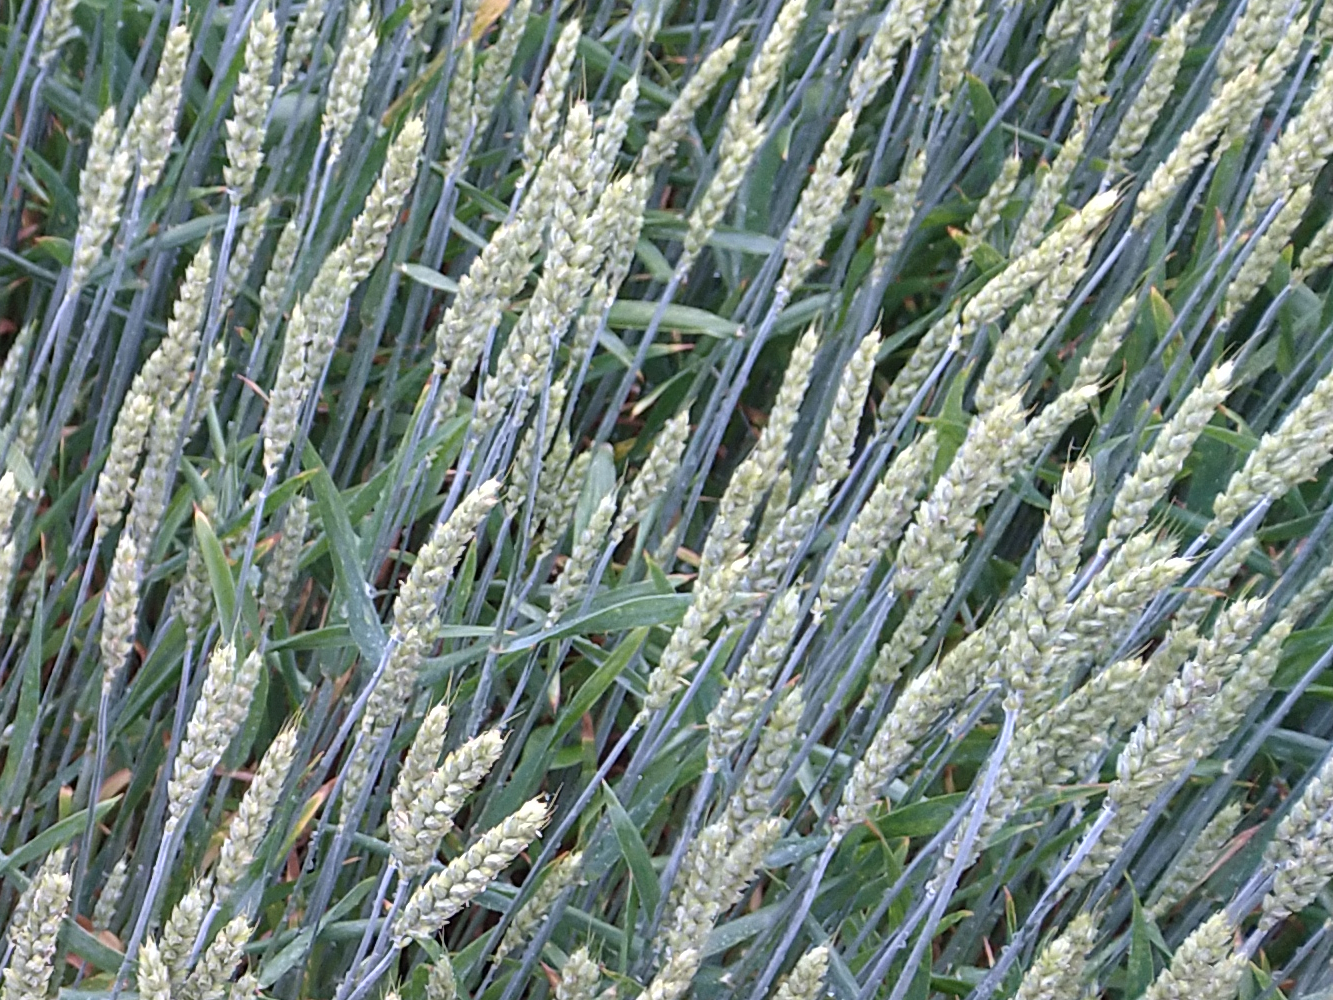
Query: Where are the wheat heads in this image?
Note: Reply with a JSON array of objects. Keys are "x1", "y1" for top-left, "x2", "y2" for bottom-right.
[
  {"x1": 93, "y1": 860, "x2": 128, "y2": 931},
  {"x1": 1225, "y1": 187, "x2": 1312, "y2": 315},
  {"x1": 1266, "y1": 801, "x2": 1333, "y2": 927},
  {"x1": 436, "y1": 229, "x2": 506, "y2": 354},
  {"x1": 546, "y1": 107, "x2": 597, "y2": 248},
  {"x1": 1108, "y1": 16, "x2": 1190, "y2": 171},
  {"x1": 976, "y1": 250, "x2": 1091, "y2": 409},
  {"x1": 548, "y1": 497, "x2": 616, "y2": 625},
  {"x1": 716, "y1": 332, "x2": 821, "y2": 532},
  {"x1": 755, "y1": 949, "x2": 832, "y2": 1000},
  {"x1": 1206, "y1": 625, "x2": 1294, "y2": 749},
  {"x1": 753, "y1": 472, "x2": 792, "y2": 549},
  {"x1": 962, "y1": 158, "x2": 1022, "y2": 252},
  {"x1": 873, "y1": 154, "x2": 927, "y2": 275},
  {"x1": 444, "y1": 42, "x2": 476, "y2": 160},
  {"x1": 913, "y1": 0, "x2": 961, "y2": 30},
  {"x1": 925, "y1": 751, "x2": 1051, "y2": 890},
  {"x1": 1171, "y1": 540, "x2": 1256, "y2": 634},
  {"x1": 613, "y1": 412, "x2": 690, "y2": 536},
  {"x1": 504, "y1": 384, "x2": 566, "y2": 510},
  {"x1": 942, "y1": 629, "x2": 983, "y2": 688},
  {"x1": 640, "y1": 563, "x2": 746, "y2": 718},
  {"x1": 477, "y1": 274, "x2": 547, "y2": 422},
  {"x1": 336, "y1": 636, "x2": 423, "y2": 824},
  {"x1": 534, "y1": 951, "x2": 599, "y2": 1000},
  {"x1": 701, "y1": 822, "x2": 784, "y2": 944},
  {"x1": 334, "y1": 37, "x2": 379, "y2": 150},
  {"x1": 817, "y1": 440, "x2": 939, "y2": 613},
  {"x1": 1223, "y1": 13, "x2": 1302, "y2": 140},
  {"x1": 0, "y1": 540, "x2": 10, "y2": 665},
  {"x1": 864, "y1": 566, "x2": 958, "y2": 702},
  {"x1": 589, "y1": 78, "x2": 640, "y2": 186},
  {"x1": 727, "y1": 690, "x2": 805, "y2": 842},
  {"x1": 1212, "y1": 381, "x2": 1333, "y2": 522},
  {"x1": 127, "y1": 403, "x2": 184, "y2": 566},
  {"x1": 219, "y1": 653, "x2": 263, "y2": 757},
  {"x1": 264, "y1": 306, "x2": 309, "y2": 473},
  {"x1": 633, "y1": 42, "x2": 740, "y2": 175},
  {"x1": 362, "y1": 625, "x2": 433, "y2": 735},
  {"x1": 1109, "y1": 369, "x2": 1235, "y2": 537},
  {"x1": 1010, "y1": 461, "x2": 1094, "y2": 687},
  {"x1": 708, "y1": 595, "x2": 801, "y2": 765},
  {"x1": 182, "y1": 509, "x2": 217, "y2": 639},
  {"x1": 0, "y1": 325, "x2": 31, "y2": 420},
  {"x1": 304, "y1": 236, "x2": 348, "y2": 322},
  {"x1": 391, "y1": 485, "x2": 503, "y2": 637},
  {"x1": 718, "y1": 0, "x2": 809, "y2": 153},
  {"x1": 7, "y1": 850, "x2": 66, "y2": 941},
  {"x1": 1020, "y1": 651, "x2": 1093, "y2": 714},
  {"x1": 221, "y1": 203, "x2": 271, "y2": 303},
  {"x1": 1119, "y1": 630, "x2": 1199, "y2": 725},
  {"x1": 37, "y1": 0, "x2": 96, "y2": 58},
  {"x1": 14, "y1": 404, "x2": 39, "y2": 461},
  {"x1": 322, "y1": 0, "x2": 372, "y2": 129},
  {"x1": 0, "y1": 473, "x2": 20, "y2": 654},
  {"x1": 1041, "y1": 0, "x2": 1150, "y2": 46},
  {"x1": 837, "y1": 644, "x2": 935, "y2": 826},
  {"x1": 686, "y1": 131, "x2": 765, "y2": 254},
  {"x1": 1066, "y1": 560, "x2": 1188, "y2": 629},
  {"x1": 1012, "y1": 133, "x2": 1084, "y2": 257},
  {"x1": 304, "y1": 270, "x2": 353, "y2": 399},
  {"x1": 1076, "y1": 0, "x2": 1117, "y2": 120},
  {"x1": 163, "y1": 247, "x2": 212, "y2": 394},
  {"x1": 786, "y1": 112, "x2": 854, "y2": 244},
  {"x1": 897, "y1": 405, "x2": 1022, "y2": 585},
  {"x1": 1314, "y1": 0, "x2": 1333, "y2": 40},
  {"x1": 24, "y1": 897, "x2": 64, "y2": 1000},
  {"x1": 1237, "y1": 65, "x2": 1333, "y2": 221},
  {"x1": 555, "y1": 958, "x2": 701, "y2": 1000},
  {"x1": 523, "y1": 20, "x2": 581, "y2": 172},
  {"x1": 282, "y1": 0, "x2": 333, "y2": 85},
  {"x1": 102, "y1": 536, "x2": 141, "y2": 690},
  {"x1": 216, "y1": 731, "x2": 296, "y2": 892},
  {"x1": 187, "y1": 346, "x2": 227, "y2": 435},
  {"x1": 1132, "y1": 73, "x2": 1253, "y2": 218},
  {"x1": 556, "y1": 173, "x2": 633, "y2": 338},
  {"x1": 518, "y1": 282, "x2": 551, "y2": 395},
  {"x1": 78, "y1": 108, "x2": 115, "y2": 237},
  {"x1": 670, "y1": 823, "x2": 727, "y2": 958},
  {"x1": 849, "y1": 0, "x2": 934, "y2": 101},
  {"x1": 261, "y1": 499, "x2": 309, "y2": 622},
  {"x1": 1093, "y1": 535, "x2": 1154, "y2": 583},
  {"x1": 167, "y1": 649, "x2": 254, "y2": 823},
  {"x1": 1281, "y1": 567, "x2": 1333, "y2": 623},
  {"x1": 224, "y1": 14, "x2": 281, "y2": 191},
  {"x1": 780, "y1": 171, "x2": 856, "y2": 298},
  {"x1": 1294, "y1": 219, "x2": 1333, "y2": 278},
  {"x1": 1260, "y1": 757, "x2": 1333, "y2": 862},
  {"x1": 963, "y1": 924, "x2": 1098, "y2": 1000},
  {"x1": 535, "y1": 428, "x2": 569, "y2": 520},
  {"x1": 1139, "y1": 958, "x2": 1246, "y2": 1000},
  {"x1": 472, "y1": 0, "x2": 533, "y2": 137},
  {"x1": 259, "y1": 222, "x2": 301, "y2": 333},
  {"x1": 141, "y1": 30, "x2": 191, "y2": 181},
  {"x1": 1287, "y1": 121, "x2": 1333, "y2": 184},
  {"x1": 396, "y1": 803, "x2": 552, "y2": 942},
  {"x1": 1092, "y1": 915, "x2": 1227, "y2": 1000},
  {"x1": 1020, "y1": 661, "x2": 1141, "y2": 757},
  {"x1": 1023, "y1": 720, "x2": 1115, "y2": 794},
  {"x1": 72, "y1": 102, "x2": 142, "y2": 279},
  {"x1": 1147, "y1": 540, "x2": 1180, "y2": 565},
  {"x1": 434, "y1": 315, "x2": 497, "y2": 423},
  {"x1": 938, "y1": 0, "x2": 989, "y2": 95},
  {"x1": 0, "y1": 874, "x2": 52, "y2": 1000},
  {"x1": 815, "y1": 332, "x2": 881, "y2": 485},
  {"x1": 1205, "y1": 0, "x2": 1325, "y2": 56},
  {"x1": 701, "y1": 462, "x2": 761, "y2": 582},
  {"x1": 987, "y1": 388, "x2": 1098, "y2": 494},
  {"x1": 1116, "y1": 596, "x2": 1263, "y2": 791},
  {"x1": 138, "y1": 945, "x2": 182, "y2": 1000},
  {"x1": 1003, "y1": 956, "x2": 1087, "y2": 1000},
  {"x1": 391, "y1": 736, "x2": 505, "y2": 876},
  {"x1": 499, "y1": 150, "x2": 561, "y2": 296},
  {"x1": 174, "y1": 920, "x2": 252, "y2": 1000},
  {"x1": 605, "y1": 180, "x2": 650, "y2": 286},
  {"x1": 1149, "y1": 806, "x2": 1242, "y2": 915},
  {"x1": 961, "y1": 206, "x2": 1109, "y2": 328},
  {"x1": 864, "y1": 450, "x2": 937, "y2": 566},
  {"x1": 1251, "y1": 0, "x2": 1301, "y2": 61},
  {"x1": 95, "y1": 340, "x2": 169, "y2": 532},
  {"x1": 721, "y1": 492, "x2": 830, "y2": 623},
  {"x1": 877, "y1": 298, "x2": 975, "y2": 432},
  {"x1": 643, "y1": 839, "x2": 694, "y2": 966},
  {"x1": 540, "y1": 453, "x2": 593, "y2": 550},
  {"x1": 1075, "y1": 298, "x2": 1139, "y2": 389},
  {"x1": 498, "y1": 856, "x2": 582, "y2": 959},
  {"x1": 391, "y1": 706, "x2": 450, "y2": 817},
  {"x1": 351, "y1": 120, "x2": 428, "y2": 284},
  {"x1": 1058, "y1": 807, "x2": 1148, "y2": 896},
  {"x1": 969, "y1": 591, "x2": 1026, "y2": 685},
  {"x1": 1268, "y1": 427, "x2": 1333, "y2": 492},
  {"x1": 158, "y1": 878, "x2": 213, "y2": 981}
]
